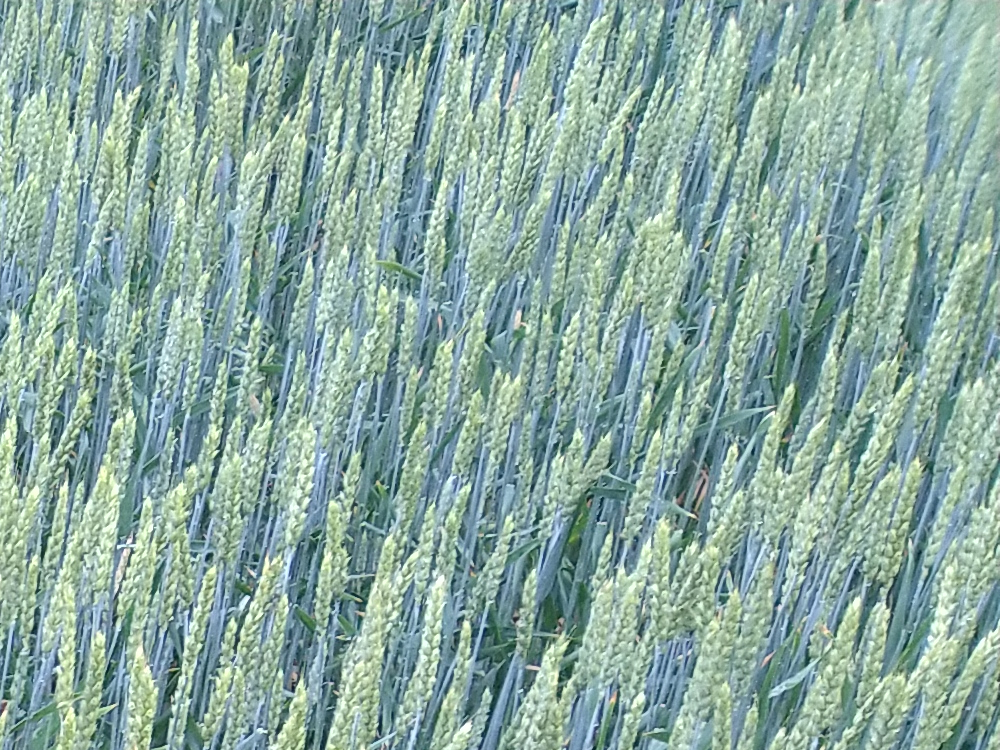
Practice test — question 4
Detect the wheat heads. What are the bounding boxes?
[528,463,549,528]
[838,0,872,70]
[366,245,378,321]
[776,85,802,165]
[580,139,624,234]
[480,0,491,36]
[578,362,599,426]
[505,205,535,269]
[821,546,852,616]
[450,621,474,717]
[327,498,339,552]
[676,9,701,79]
[258,232,269,278]
[904,657,927,700]
[425,12,444,40]
[25,282,57,357]
[589,366,610,420]
[0,345,11,403]
[38,87,47,119]
[626,363,640,417]
[138,0,151,40]
[634,215,661,288]
[481,441,506,493]
[49,340,79,411]
[224,668,246,747]
[32,295,65,363]
[146,281,162,341]
[588,579,615,677]
[610,279,633,334]
[48,713,77,750]
[930,540,957,602]
[416,507,436,590]
[473,197,493,262]
[323,110,344,186]
[238,154,256,209]
[830,366,888,452]
[389,510,413,577]
[234,199,253,250]
[300,0,314,21]
[426,243,448,302]
[474,29,494,89]
[529,43,547,122]
[319,359,351,433]
[740,0,754,33]
[313,335,333,415]
[633,395,653,450]
[362,594,385,653]
[658,172,682,233]
[830,480,885,585]
[564,16,610,103]
[331,548,349,599]
[951,381,985,475]
[591,248,619,276]
[737,204,748,240]
[685,110,704,162]
[883,42,898,91]
[951,514,985,594]
[779,503,818,604]
[356,329,378,368]
[935,205,963,281]
[192,127,210,181]
[700,34,712,58]
[259,600,287,709]
[286,352,305,420]
[918,0,954,53]
[412,48,431,120]
[157,543,184,626]
[602,266,627,345]
[959,606,980,648]
[431,479,456,548]
[885,78,902,130]
[883,250,916,356]
[705,551,721,605]
[328,192,358,257]
[593,230,608,259]
[700,306,727,378]
[477,369,502,441]
[354,150,368,185]
[284,137,305,213]
[189,185,199,223]
[163,100,178,155]
[724,36,740,88]
[953,242,971,268]
[162,196,185,283]
[408,448,436,518]
[711,491,746,563]
[441,119,472,188]
[723,279,760,379]
[646,90,686,176]
[820,8,835,33]
[149,428,175,518]
[815,42,827,66]
[347,382,373,441]
[542,25,568,94]
[50,210,64,272]
[392,669,418,739]
[274,131,290,170]
[941,57,957,103]
[596,0,612,23]
[61,139,79,196]
[731,103,761,195]
[113,146,126,226]
[80,470,109,556]
[857,604,883,667]
[23,102,37,168]
[42,0,53,35]
[461,264,484,316]
[362,287,391,380]
[809,190,824,230]
[476,159,499,203]
[925,563,961,658]
[859,606,890,702]
[501,113,524,198]
[890,73,928,150]
[397,424,427,511]
[862,472,903,582]
[507,648,549,750]
[938,637,994,740]
[833,600,855,656]
[799,9,811,40]
[379,551,420,638]
[613,693,646,750]
[283,684,306,750]
[688,21,711,69]
[333,0,340,15]
[630,625,656,698]
[56,23,63,54]
[182,111,194,149]
[668,247,693,306]
[853,673,906,750]
[193,273,210,313]
[38,535,78,652]
[858,97,888,168]
[770,182,797,243]
[78,632,107,750]
[316,254,339,329]
[556,361,588,429]
[0,429,13,540]
[271,162,290,206]
[598,69,613,104]
[590,533,614,597]
[673,5,686,61]
[562,436,613,515]
[769,56,789,93]
[1,487,42,574]
[336,283,357,327]
[734,589,755,689]
[565,434,586,487]
[473,99,488,153]
[931,172,958,249]
[125,647,147,750]
[448,1,471,56]
[239,653,263,738]
[772,386,795,429]
[87,190,115,262]
[666,723,692,750]
[388,72,414,159]
[201,362,227,468]
[45,484,69,570]
[81,345,96,395]
[11,101,31,148]
[325,446,339,488]
[801,127,820,199]
[14,556,39,644]
[84,0,102,53]
[657,342,684,404]
[618,12,634,47]
[958,281,1000,387]
[543,107,576,193]
[776,226,802,285]
[268,457,286,512]
[525,200,547,253]
[926,247,980,354]
[654,161,673,206]
[488,205,508,250]
[464,333,488,387]
[979,365,1000,426]
[518,415,535,489]
[461,51,474,119]
[661,235,686,306]
[181,568,218,686]
[127,671,160,750]
[145,590,160,649]
[442,65,464,150]
[182,62,200,118]
[915,415,938,466]
[678,626,721,733]
[815,357,839,424]
[877,0,893,45]
[854,24,874,67]
[427,100,447,170]
[507,72,518,110]
[334,250,350,295]
[233,560,283,673]
[825,309,848,367]
[861,250,880,334]
[794,223,816,289]
[267,673,283,736]
[556,314,581,393]
[680,381,711,455]
[706,203,735,298]
[384,67,401,124]
[745,291,777,359]
[939,0,968,39]
[489,217,515,280]
[879,463,924,583]
[0,72,11,145]
[287,427,317,544]
[533,314,553,397]
[262,56,285,125]
[696,66,721,154]
[103,296,117,346]
[972,413,1000,475]
[40,92,63,158]
[676,556,710,613]
[370,538,397,609]
[202,671,232,740]
[631,144,646,182]
[802,245,827,328]
[630,63,643,90]
[893,168,923,224]
[354,216,372,258]
[74,63,84,125]
[557,680,580,748]
[821,184,835,225]
[112,90,124,140]
[338,328,356,371]
[366,206,383,255]
[393,523,411,568]
[655,717,684,750]
[708,686,731,750]
[278,433,303,523]
[178,541,191,606]
[650,157,667,190]
[635,538,652,598]
[950,0,978,44]
[233,259,250,338]
[1,11,29,67]
[851,280,868,330]
[820,44,842,89]
[126,310,142,351]
[885,44,896,79]
[910,142,927,183]
[368,0,380,20]
[524,670,559,750]
[750,187,771,260]
[55,0,73,54]
[716,594,741,682]
[493,376,512,436]
[955,276,988,341]
[527,87,553,154]
[487,8,515,75]
[129,129,149,225]
[831,53,849,91]
[559,14,568,45]
[835,0,846,36]
[756,562,774,634]
[547,644,568,673]
[34,200,48,248]
[230,66,247,153]
[878,242,905,324]
[112,537,133,591]
[901,96,929,174]
[608,591,641,683]
[486,91,500,157]
[420,344,444,420]
[854,380,913,491]
[82,118,88,170]
[946,28,990,147]
[733,704,759,750]
[78,61,98,118]
[637,78,666,142]
[256,34,279,98]
[215,97,228,154]
[965,171,1000,238]
[622,433,664,538]
[208,69,219,129]
[799,9,825,72]
[788,423,829,481]
[951,109,979,170]
[315,0,331,22]
[830,76,868,157]
[454,395,483,473]
[650,85,672,147]
[249,389,272,442]
[493,378,520,460]
[348,48,365,128]
[63,291,79,344]
[690,51,708,96]
[185,462,202,494]
[1,178,35,258]
[814,680,895,750]
[535,705,564,750]
[956,470,982,522]
[221,34,234,95]
[413,581,445,702]
[325,668,365,750]
[25,435,52,497]
[30,14,39,65]
[905,195,928,236]
[935,115,966,161]
[717,21,735,61]
[578,282,597,357]
[772,48,800,140]
[830,69,858,135]
[708,444,739,531]
[708,102,724,167]
[479,518,516,605]
[549,223,570,303]
[918,61,932,104]
[964,507,1000,608]
[921,177,941,234]
[492,54,507,92]
[93,133,109,200]
[498,700,527,750]
[182,309,200,409]
[146,86,165,130]
[910,332,950,423]
[433,342,453,419]
[217,618,238,668]
[763,0,783,43]
[166,667,192,750]
[928,65,947,95]
[0,147,21,231]
[605,299,636,365]
[817,86,834,166]
[783,727,804,750]
[952,253,982,328]
[320,29,341,100]
[574,0,589,36]
[977,36,1000,101]
[732,57,747,102]
[610,173,635,249]
[531,0,549,27]
[29,341,53,439]
[189,20,201,67]
[97,486,120,588]
[957,96,999,195]
[789,139,809,173]
[789,399,816,458]
[517,281,544,394]
[248,145,271,196]
[182,230,199,292]
[115,410,137,482]
[935,386,973,468]
[369,64,384,146]
[647,6,662,59]
[367,154,379,182]
[244,191,265,259]
[315,551,332,630]
[162,23,176,82]
[291,377,311,423]
[336,377,359,430]
[825,466,849,538]
[581,106,606,176]
[10,643,30,701]
[975,671,998,729]
[290,259,314,337]
[923,470,965,565]
[235,605,261,670]
[109,0,128,51]
[615,563,627,596]
[271,557,288,597]
[513,0,525,37]
[872,216,882,251]
[903,184,922,220]
[340,453,362,526]
[425,182,448,267]
[540,456,561,538]
[565,233,591,306]
[363,655,384,739]
[701,155,731,226]
[460,150,476,236]
[13,6,32,78]
[0,541,21,643]
[338,61,350,93]
[804,59,817,101]
[982,481,1000,518]
[158,301,183,393]
[386,154,406,219]
[859,69,880,126]
[765,470,788,525]
[740,619,766,684]
[721,77,733,139]
[464,556,497,618]
[458,311,479,387]
[875,359,900,419]
[272,503,291,553]
[749,417,782,521]
[301,33,325,108]
[160,17,168,58]
[899,39,915,72]
[8,314,22,412]
[741,3,761,53]
[401,368,419,441]
[239,319,262,410]
[100,418,124,477]
[517,571,538,652]
[2,10,15,52]
[173,150,192,209]
[937,335,968,393]
[49,394,90,475]
[80,540,96,602]
[170,485,188,522]
[155,151,168,200]
[32,100,44,169]
[200,157,219,217]
[775,470,811,527]
[724,351,746,430]
[217,464,238,562]
[89,123,97,172]
[378,289,400,379]
[581,28,608,103]
[666,99,692,165]
[665,384,686,460]
[669,542,696,608]
[114,354,128,412]
[811,670,844,731]
[513,460,533,528]
[648,526,672,634]
[322,149,350,230]
[779,7,796,60]
[739,91,771,203]
[910,646,960,750]
[574,586,599,688]
[792,678,821,730]
[43,93,71,190]
[400,298,417,370]
[210,226,226,260]
[567,137,582,175]
[597,89,642,157]
[393,0,405,19]
[512,112,559,202]
[641,313,671,388]
[66,482,83,551]
[298,104,313,138]
[815,444,844,506]
[475,281,501,324]
[242,422,271,513]
[65,201,76,265]
[356,533,368,580]
[610,33,635,105]
[836,479,875,544]
[621,231,644,272]
[116,87,142,143]
[623,0,641,18]
[120,503,153,614]
[57,589,78,708]
[469,688,491,750]
[210,417,239,510]
[858,146,885,226]
[270,419,285,465]
[0,488,21,570]
[893,61,922,104]
[125,538,160,657]
[37,44,54,87]
[437,486,470,574]
[260,241,277,294]
[214,287,232,336]
[118,206,143,275]
[427,696,451,750]
[116,281,131,350]
[981,208,992,241]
